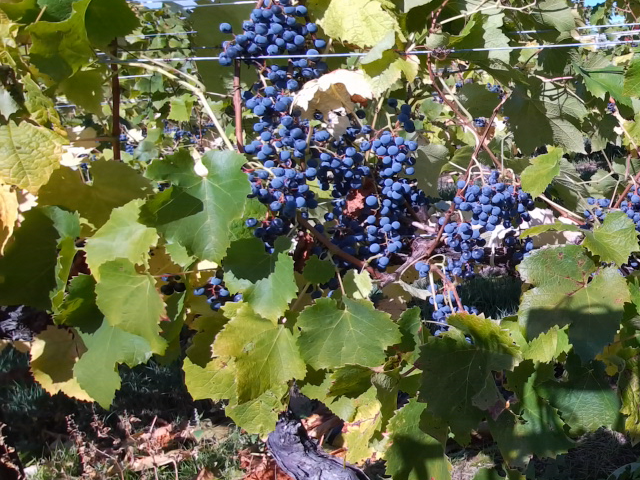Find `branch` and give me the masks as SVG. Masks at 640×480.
<instances>
[{"instance_id": "1d269e1b", "label": "branch", "mask_w": 640, "mask_h": 480, "mask_svg": "<svg viewBox=\"0 0 640 480\" xmlns=\"http://www.w3.org/2000/svg\"><path fill=\"white\" fill-rule=\"evenodd\" d=\"M553 207H554V210H555L556 212H558L559 214H562L564 217H566L568 220L572 221L573 223H575V224H577V225H579V226H581V227H585V226H586V223H585V222H583L582 220H579V219H577L576 217H574V216H572V215H570V214H567V213L563 212L560 208H557V207H555V206H553Z\"/></svg>"}, {"instance_id": "325d2c04", "label": "branch", "mask_w": 640, "mask_h": 480, "mask_svg": "<svg viewBox=\"0 0 640 480\" xmlns=\"http://www.w3.org/2000/svg\"><path fill=\"white\" fill-rule=\"evenodd\" d=\"M119 66L121 68H136V69H140V70H149L151 72H154V73L160 75L161 77H165L166 79H172L179 86H182V87L188 89L193 95H195V96H197L199 98L201 106L204 108L205 112L208 114V116L211 119V124L215 127L217 133L222 137L224 142L227 144V148L230 151H233L235 149L234 142L229 137V135L224 131L221 123L218 121V117H217L216 113L214 112V110L211 108V106L207 102L206 96L204 95V93L201 90L197 89L193 84H191L190 82L182 79L181 77H179L174 72H168L167 70H163L162 68H160V67H158L156 65H153L151 63L119 64Z\"/></svg>"}, {"instance_id": "30e6481e", "label": "branch", "mask_w": 640, "mask_h": 480, "mask_svg": "<svg viewBox=\"0 0 640 480\" xmlns=\"http://www.w3.org/2000/svg\"><path fill=\"white\" fill-rule=\"evenodd\" d=\"M432 55H427L426 56V63H427V67H428V74L430 76V80H431V86L433 89L436 90L437 94L440 95L441 99L445 102V104L461 119V121L463 122V124L470 130L472 131L475 136L477 137V139L479 140L476 148L469 160V163L467 164V167L465 168V171L463 173L462 179L463 180H467L469 173L472 169V167L474 166V162L476 160V158L478 157L481 148L483 147L484 152L487 153L490 158L497 164V166L499 167V169L501 170V172L508 178L511 179L512 178V174L504 167L503 163L499 160V158L492 152L491 149H489V146L487 145V142L485 141V139L487 138V135L490 131V128L492 126V124L495 121V117L497 115V112L499 111L500 107L504 105L503 101H499L496 103L495 107L493 108L491 114H490V118L485 126V129L483 130V133L481 135V133L479 132V130L477 128H475L469 121L468 119L460 112V110L448 99V97L446 96V94L441 90V88L439 87V85L436 83V77L433 71V65H432V61H431Z\"/></svg>"}, {"instance_id": "1ff4a987", "label": "branch", "mask_w": 640, "mask_h": 480, "mask_svg": "<svg viewBox=\"0 0 640 480\" xmlns=\"http://www.w3.org/2000/svg\"><path fill=\"white\" fill-rule=\"evenodd\" d=\"M454 208H455V205L451 204L449 206V210L445 212V218L446 219L440 224V227L438 228L436 237L433 240L432 246L426 251V255L427 256L431 255V251L436 248V245L441 240L444 228L451 222V216L454 214Z\"/></svg>"}, {"instance_id": "ca6c30ca", "label": "branch", "mask_w": 640, "mask_h": 480, "mask_svg": "<svg viewBox=\"0 0 640 480\" xmlns=\"http://www.w3.org/2000/svg\"><path fill=\"white\" fill-rule=\"evenodd\" d=\"M448 1L447 0H443L438 11L437 14L434 16V18L431 20V28L429 30V34L433 35L435 33L436 30V23L437 21L441 18L443 11L445 10V7L447 6Z\"/></svg>"}, {"instance_id": "45aa463d", "label": "branch", "mask_w": 640, "mask_h": 480, "mask_svg": "<svg viewBox=\"0 0 640 480\" xmlns=\"http://www.w3.org/2000/svg\"><path fill=\"white\" fill-rule=\"evenodd\" d=\"M119 81H120V76L118 74H115L112 78V91H113V99H112V106H113V120L111 123V130L113 133V140H112V156L115 160H118L120 158V151H121V139H120V128H119V123H120V89H119Z\"/></svg>"}, {"instance_id": "982ccf7c", "label": "branch", "mask_w": 640, "mask_h": 480, "mask_svg": "<svg viewBox=\"0 0 640 480\" xmlns=\"http://www.w3.org/2000/svg\"><path fill=\"white\" fill-rule=\"evenodd\" d=\"M295 220L304 228L306 229L308 232H310L312 235H314L322 245H324L328 250H330L333 254H335L337 257L342 258L344 260H346L347 262L356 265L358 267H363L365 265V262L363 260H360L359 258H355L354 256L341 251L340 249H338L337 247H335L331 242H329L325 236L314 226H312L310 223H308L300 213H297L295 215Z\"/></svg>"}, {"instance_id": "170604dd", "label": "branch", "mask_w": 640, "mask_h": 480, "mask_svg": "<svg viewBox=\"0 0 640 480\" xmlns=\"http://www.w3.org/2000/svg\"><path fill=\"white\" fill-rule=\"evenodd\" d=\"M240 77H241V61H234V75H233V84H232V96L234 100V121H235V141H236V150L238 152H242L244 150V143L242 139V128L243 122L241 119V98L239 94L240 87Z\"/></svg>"}, {"instance_id": "ea751061", "label": "branch", "mask_w": 640, "mask_h": 480, "mask_svg": "<svg viewBox=\"0 0 640 480\" xmlns=\"http://www.w3.org/2000/svg\"><path fill=\"white\" fill-rule=\"evenodd\" d=\"M640 179V172H638L628 183V185H626L623 189V191L621 192L620 196L617 198V200L614 202L613 207L614 208H618L620 203L623 201V199L626 197V195L628 194L629 190L633 187V185L636 183V181H638Z\"/></svg>"}]
</instances>
